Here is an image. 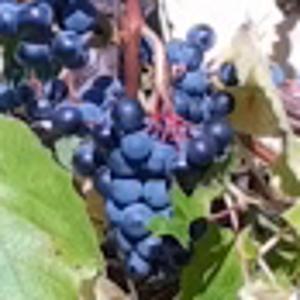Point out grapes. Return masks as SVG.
<instances>
[{"label": "grapes", "mask_w": 300, "mask_h": 300, "mask_svg": "<svg viewBox=\"0 0 300 300\" xmlns=\"http://www.w3.org/2000/svg\"><path fill=\"white\" fill-rule=\"evenodd\" d=\"M216 41L207 24L191 25L183 40L167 38L163 50L173 78L153 84L141 103L115 76L94 77L79 100H71L62 78L0 90L2 107L27 106L31 116L50 120L55 137L82 140L70 153L72 171L90 180L107 206L108 244L136 284L162 282L190 264L189 250L173 233L152 235L146 224L173 213L172 190L195 196L201 173L231 156L234 97L204 69Z\"/></svg>", "instance_id": "01657485"}, {"label": "grapes", "mask_w": 300, "mask_h": 300, "mask_svg": "<svg viewBox=\"0 0 300 300\" xmlns=\"http://www.w3.org/2000/svg\"><path fill=\"white\" fill-rule=\"evenodd\" d=\"M99 8L90 0H0V34L14 39L13 57L24 67L59 60L83 70L101 37Z\"/></svg>", "instance_id": "b958b902"}, {"label": "grapes", "mask_w": 300, "mask_h": 300, "mask_svg": "<svg viewBox=\"0 0 300 300\" xmlns=\"http://www.w3.org/2000/svg\"><path fill=\"white\" fill-rule=\"evenodd\" d=\"M218 80L227 89H235L241 83V76L236 65L231 61H224L218 67Z\"/></svg>", "instance_id": "0513c4c2"}, {"label": "grapes", "mask_w": 300, "mask_h": 300, "mask_svg": "<svg viewBox=\"0 0 300 300\" xmlns=\"http://www.w3.org/2000/svg\"><path fill=\"white\" fill-rule=\"evenodd\" d=\"M209 231V224L203 218L193 219L187 227V234L193 240L203 239Z\"/></svg>", "instance_id": "84f90ec7"}]
</instances>
